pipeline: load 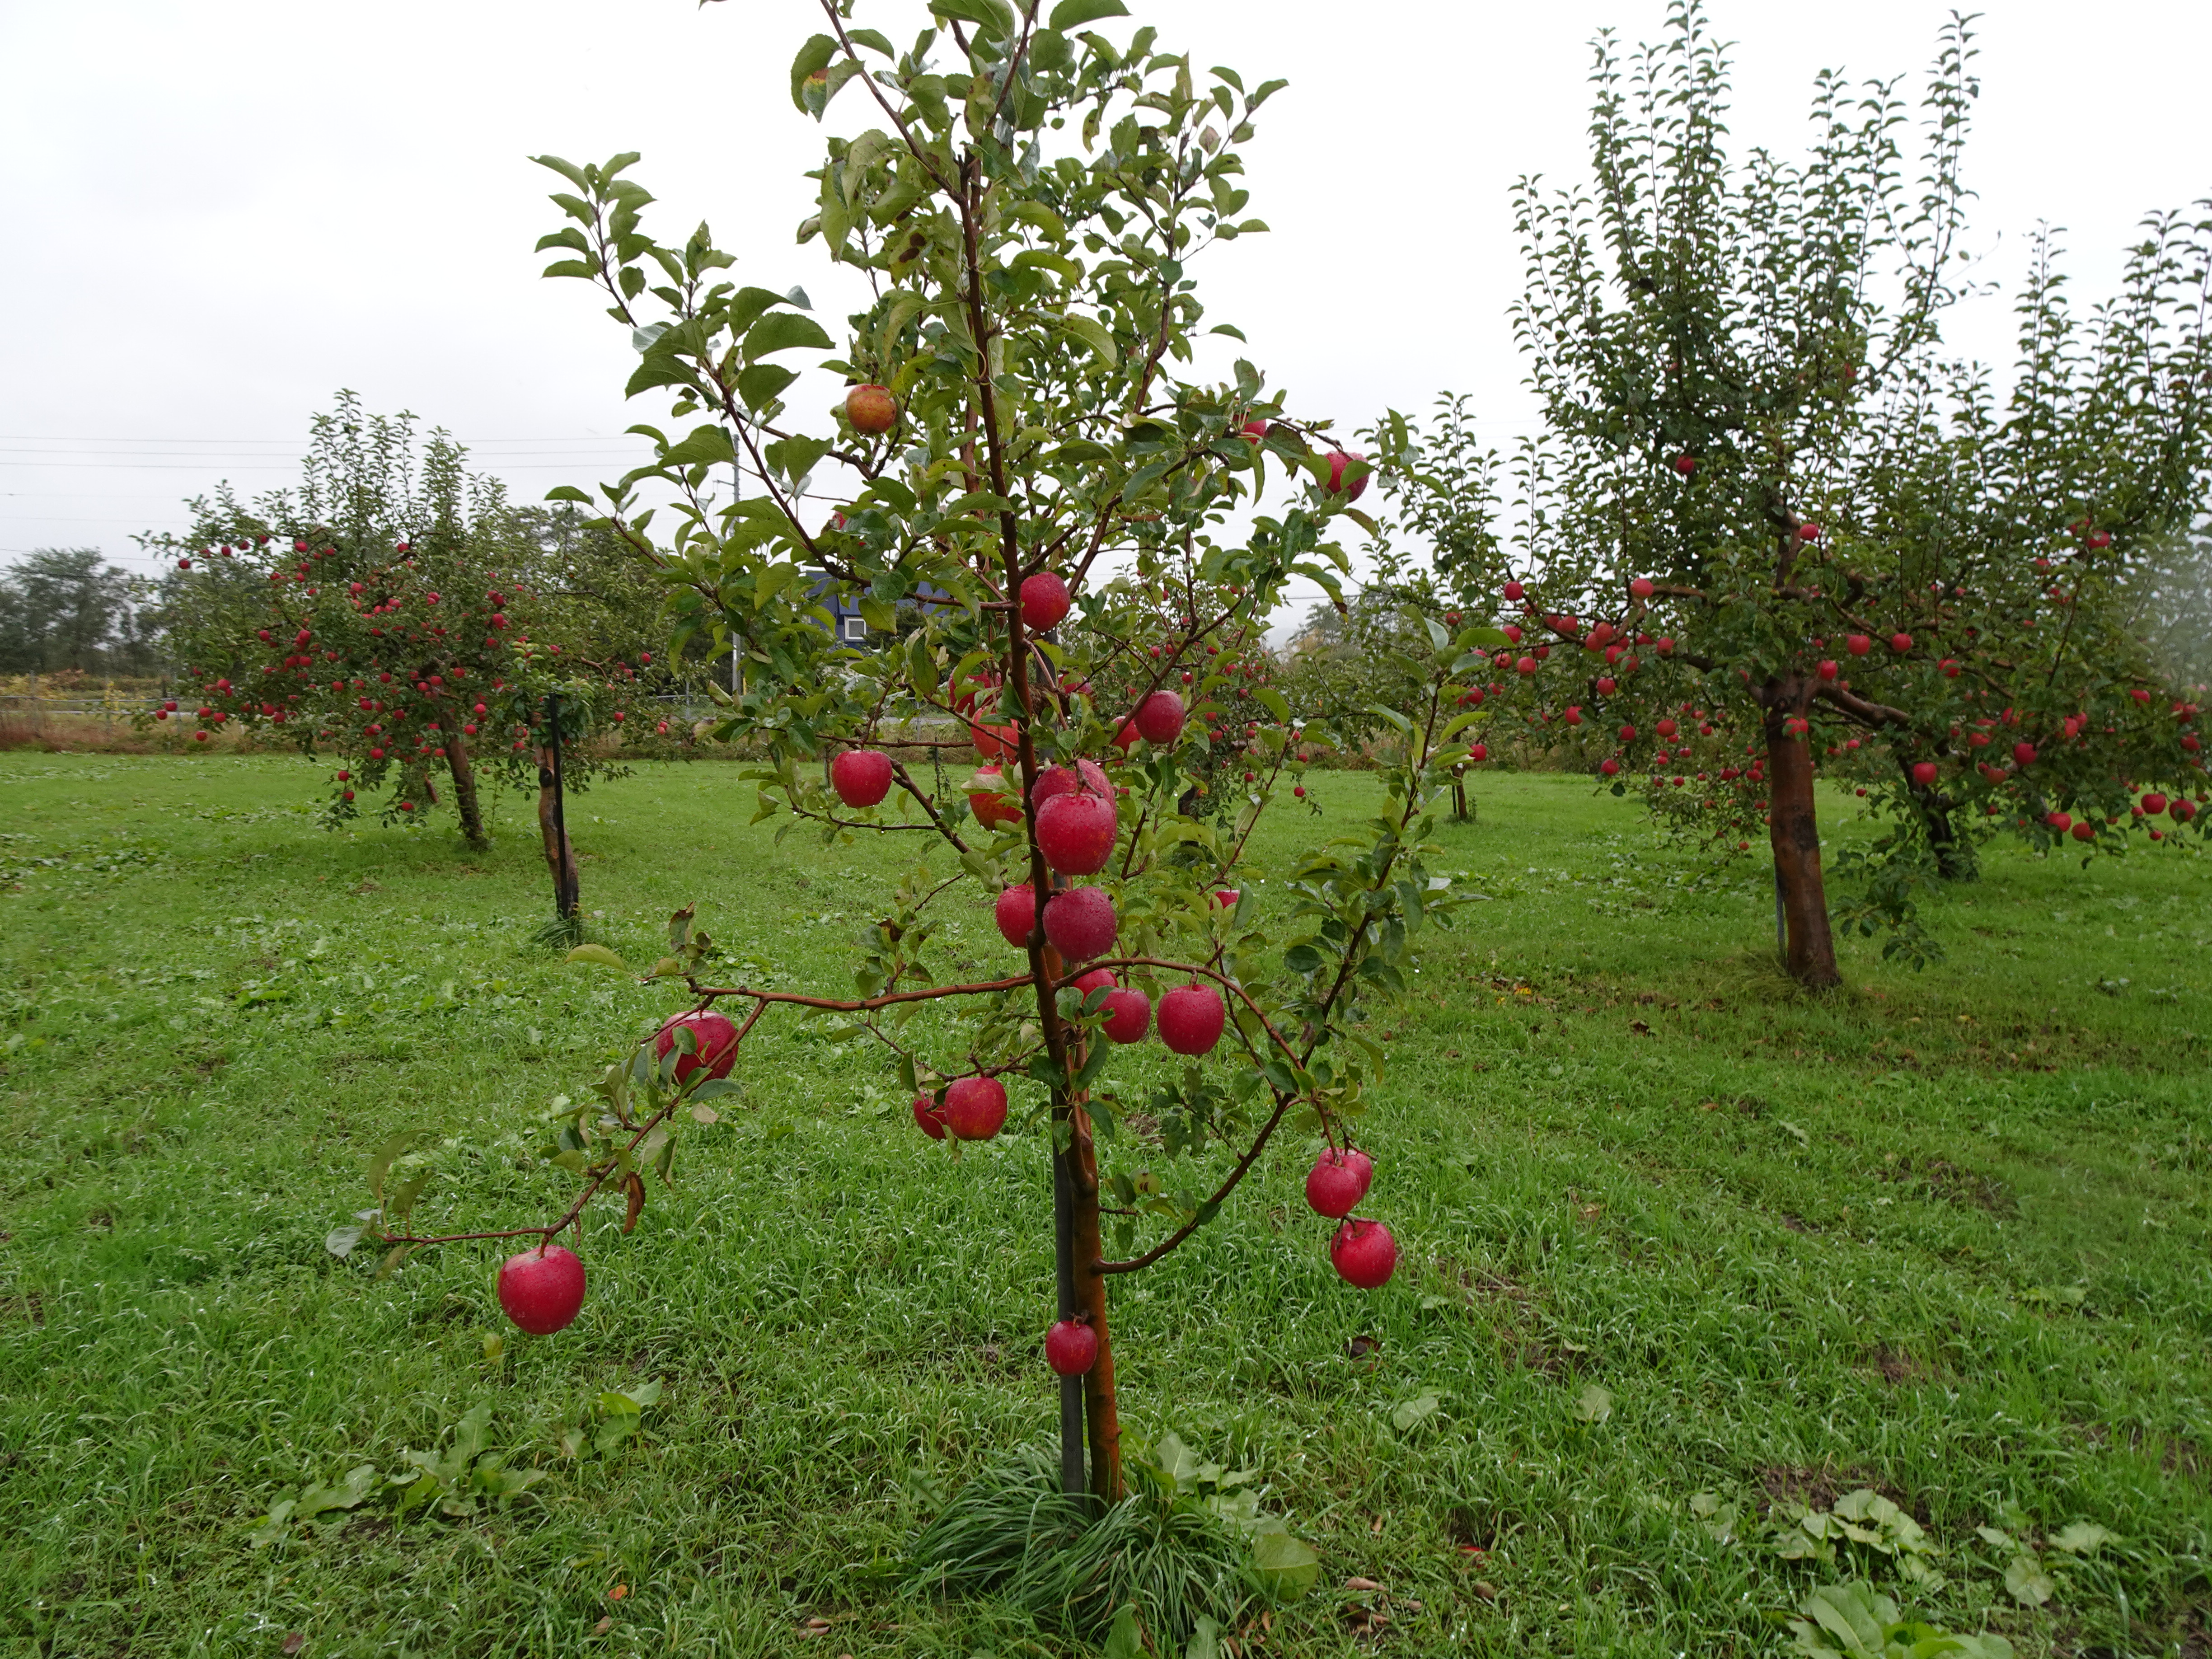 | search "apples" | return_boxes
[1316,451,1369,503]
[498,1245,586,1335]
[995,884,1035,947]
[831,750,893,808]
[969,766,1025,830]
[832,510,866,560]
[995,758,1017,766]
[1306,1164,1361,1218]
[1042,886,1116,963]
[948,666,1002,718]
[913,1090,948,1142]
[1045,1320,1098,1376]
[1232,407,1266,446]
[1032,758,1115,815]
[1209,890,1240,911]
[1020,571,1070,632]
[1156,984,1224,1055]
[944,1076,1007,1141]
[1072,967,1119,1016]
[656,1010,738,1090]
[1125,712,1134,721]
[971,706,1019,761]
[1315,1148,1372,1201]
[1058,674,1093,694]
[845,383,897,435]
[1109,716,1141,754]
[1097,988,1151,1044]
[1330,1218,1396,1289]
[1134,690,1184,744]
[1035,793,1116,875]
